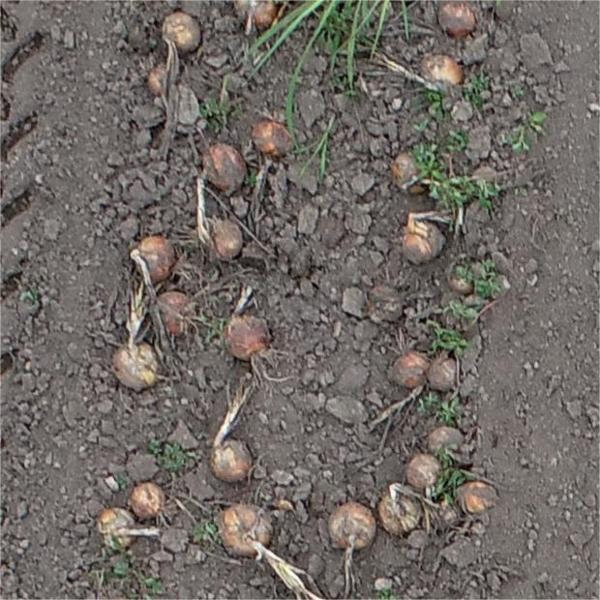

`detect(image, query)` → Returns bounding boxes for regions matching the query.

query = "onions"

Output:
[134,234,176,282]
[390,349,427,387]
[155,290,191,333]
[458,478,493,513]
[222,315,268,359]
[387,150,420,187]
[159,12,199,53]
[438,2,478,36]
[96,507,131,546]
[447,262,475,293]
[128,481,163,518]
[207,219,240,256]
[208,437,250,478]
[326,504,374,550]
[405,452,440,491]
[426,356,455,388]
[379,485,420,534]
[248,116,289,156]
[143,67,168,94]
[402,215,442,261]
[245,0,279,32]
[428,424,459,451]
[112,340,158,388]
[424,491,460,525]
[220,502,264,551]
[421,54,463,88]
[202,143,245,191]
